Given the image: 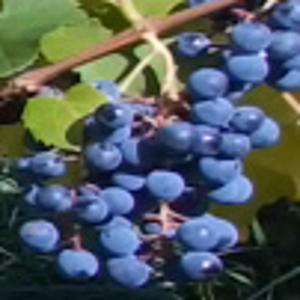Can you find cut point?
Returning a JSON list of instances; mask_svg holds the SVG:
<instances>
[{"mask_svg":"<svg viewBox=\"0 0 300 300\" xmlns=\"http://www.w3.org/2000/svg\"><path fill=\"white\" fill-rule=\"evenodd\" d=\"M152 42L155 47L153 48L152 52L144 57L134 68L133 70L123 79L120 89L125 91L130 82L139 74V72L151 61H153L159 53L164 55L166 66H167V82L172 84L177 82V65L173 62V52L166 47L163 42L157 37L156 39L150 41Z\"/></svg>","mask_w":300,"mask_h":300,"instance_id":"cut-point-1","label":"cut point"}]
</instances>
